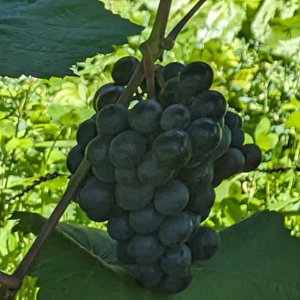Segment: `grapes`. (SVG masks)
<instances>
[{"label": "grapes", "instance_id": "grapes-1", "mask_svg": "<svg viewBox=\"0 0 300 300\" xmlns=\"http://www.w3.org/2000/svg\"><path fill=\"white\" fill-rule=\"evenodd\" d=\"M138 66L136 57L116 62L115 83L94 95L97 113L78 128L67 169L74 173L85 157L92 163L77 203L92 220H108L118 257L135 281L179 293L190 284L191 261L211 259L221 245L214 228L199 227L210 214L213 189L255 170L262 153L242 144L241 117L226 110L220 92L208 90L214 73L205 62L161 69L165 109L153 98L130 110L117 103Z\"/></svg>", "mask_w": 300, "mask_h": 300}]
</instances>
